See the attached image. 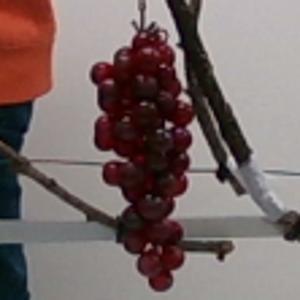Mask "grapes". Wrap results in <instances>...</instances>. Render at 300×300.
Instances as JSON below:
<instances>
[{
	"label": "grapes",
	"instance_id": "01657485",
	"mask_svg": "<svg viewBox=\"0 0 300 300\" xmlns=\"http://www.w3.org/2000/svg\"><path fill=\"white\" fill-rule=\"evenodd\" d=\"M175 62L174 48L152 30L142 29L133 36L132 46L115 52L112 64L99 61L89 71L102 113L93 125V145L128 159L108 161L101 170L104 183L119 186L124 200L131 203L121 215L129 230L122 246L137 256L136 270L157 293L171 289L172 272L185 262L178 247L183 228L167 218L176 209L173 197L188 187L184 173L191 165L187 150L193 143L188 125L195 110L178 99L182 81Z\"/></svg>",
	"mask_w": 300,
	"mask_h": 300
}]
</instances>
